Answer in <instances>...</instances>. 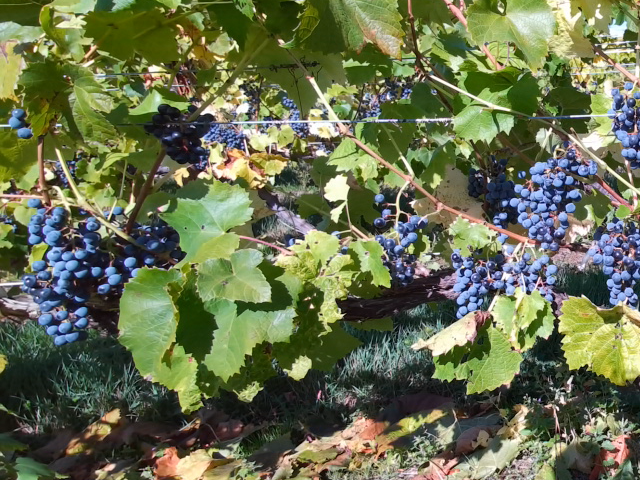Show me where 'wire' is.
<instances>
[{
    "mask_svg": "<svg viewBox=\"0 0 640 480\" xmlns=\"http://www.w3.org/2000/svg\"><path fill=\"white\" fill-rule=\"evenodd\" d=\"M414 122L420 123H452V118H415L406 117L399 119H380V120H354V119H304V120H276V121H212V126H278V125H306V124H352V125H382V124H401Z\"/></svg>",
    "mask_w": 640,
    "mask_h": 480,
    "instance_id": "wire-1",
    "label": "wire"
}]
</instances>
